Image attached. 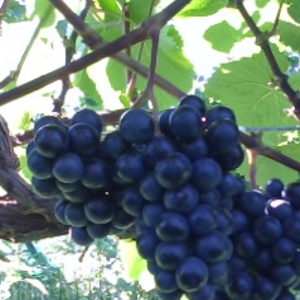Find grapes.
<instances>
[{
    "mask_svg": "<svg viewBox=\"0 0 300 300\" xmlns=\"http://www.w3.org/2000/svg\"><path fill=\"white\" fill-rule=\"evenodd\" d=\"M233 110L196 95L154 120L128 108L100 141L97 111L71 126L46 116L27 147L32 184L57 194L56 218L75 242L117 235L137 241L162 297L300 300V181L246 190Z\"/></svg>",
    "mask_w": 300,
    "mask_h": 300,
    "instance_id": "1",
    "label": "grapes"
}]
</instances>
